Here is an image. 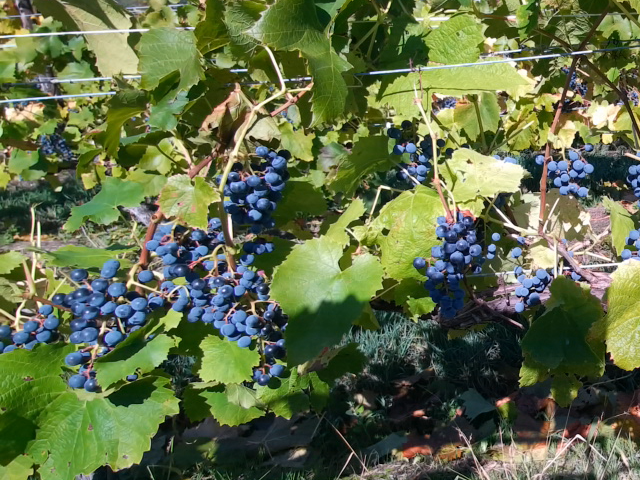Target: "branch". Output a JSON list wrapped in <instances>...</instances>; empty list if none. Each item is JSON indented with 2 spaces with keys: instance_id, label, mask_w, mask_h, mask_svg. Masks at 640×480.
I'll use <instances>...</instances> for the list:
<instances>
[{
  "instance_id": "30e6481e",
  "label": "branch",
  "mask_w": 640,
  "mask_h": 480,
  "mask_svg": "<svg viewBox=\"0 0 640 480\" xmlns=\"http://www.w3.org/2000/svg\"><path fill=\"white\" fill-rule=\"evenodd\" d=\"M578 61L582 62L583 64H585L591 71L595 72L598 76H600L604 81H606L614 90H616L619 95L621 96V99L623 100L626 109L628 111V115L630 116V122L633 124V127L636 131L637 134V138L640 139V123L637 121V119L633 116L632 113V108H631V103L629 102V97L628 94L626 93V91L624 90V88L619 85L609 74H607L605 71H603L601 68H599L597 65H595L589 58L585 57L584 55H575L572 57L570 64H569V68L568 71L565 75L564 81H563V86L562 88L559 90V96L557 99V103L555 106V111H554V115H553V119L551 121V126L547 132V139L545 142V149H544V155L546 157H549L551 155L552 152V134L555 133L557 131L558 128V123L560 121V117H561V113H562V108L564 105V101L566 98V93L569 91L570 88V84H571V80L572 77L576 71V67L578 64Z\"/></svg>"
},
{
  "instance_id": "ea751061",
  "label": "branch",
  "mask_w": 640,
  "mask_h": 480,
  "mask_svg": "<svg viewBox=\"0 0 640 480\" xmlns=\"http://www.w3.org/2000/svg\"><path fill=\"white\" fill-rule=\"evenodd\" d=\"M18 295L20 297H22V298H25V299H30V300H33V301H37V302H41V303H44V304L51 305L54 308H56L57 310L62 311V312H70L71 311L70 307L61 306L57 302H55L54 300H51V299H47V298H44V297L36 296V295H33V294H27V293L22 292V291H19Z\"/></svg>"
},
{
  "instance_id": "325d2c04",
  "label": "branch",
  "mask_w": 640,
  "mask_h": 480,
  "mask_svg": "<svg viewBox=\"0 0 640 480\" xmlns=\"http://www.w3.org/2000/svg\"><path fill=\"white\" fill-rule=\"evenodd\" d=\"M312 90L311 86L308 87H298V88H286L285 90L278 92L274 95H272L271 97L267 98L264 101H261L259 103H257L253 108L249 109L246 114H245V121L243 123L240 135L238 136L237 139H235L233 141V144L235 145V147L233 148V150L231 151V153L229 154V157L227 158V161L225 163V166L223 168V172L222 175L219 179V183H218V189H217V193L219 195H222L225 191V186H226V182L229 178V174L231 171V168L234 164V161L237 157V155L239 154V152L241 151V149L244 147V140L247 137L248 131L250 129V125L252 124V121L254 120V116L257 113L258 109H260L261 107L267 106L270 103L274 102L276 99L283 97L285 95H287L288 93H300V92H310Z\"/></svg>"
},
{
  "instance_id": "1af6ec82",
  "label": "branch",
  "mask_w": 640,
  "mask_h": 480,
  "mask_svg": "<svg viewBox=\"0 0 640 480\" xmlns=\"http://www.w3.org/2000/svg\"><path fill=\"white\" fill-rule=\"evenodd\" d=\"M138 259H142L143 266H147L149 264V261L152 259V256L150 255V252L147 249H143L138 257Z\"/></svg>"
},
{
  "instance_id": "170604dd",
  "label": "branch",
  "mask_w": 640,
  "mask_h": 480,
  "mask_svg": "<svg viewBox=\"0 0 640 480\" xmlns=\"http://www.w3.org/2000/svg\"><path fill=\"white\" fill-rule=\"evenodd\" d=\"M413 93L415 95V98L417 100V105L419 107V110L421 112V115L424 118L425 124H426V129L432 139L433 142V182L434 185L437 189L438 195H439V199L442 203V205L445 208V211L449 217L450 221H454L455 217L453 215V212L448 204V202L446 201V198L444 196L443 193V189L441 187L440 184L437 183L438 178V139L437 136L435 135V132L432 128V124L429 118V115L427 114L424 105H423V101H422V97L420 96V92L418 91V81L414 80L413 81Z\"/></svg>"
},
{
  "instance_id": "1d269e1b",
  "label": "branch",
  "mask_w": 640,
  "mask_h": 480,
  "mask_svg": "<svg viewBox=\"0 0 640 480\" xmlns=\"http://www.w3.org/2000/svg\"><path fill=\"white\" fill-rule=\"evenodd\" d=\"M215 159L213 154L207 155L201 162L192 167L188 173L190 178H193L200 170L206 168L208 164Z\"/></svg>"
},
{
  "instance_id": "ca6c30ca",
  "label": "branch",
  "mask_w": 640,
  "mask_h": 480,
  "mask_svg": "<svg viewBox=\"0 0 640 480\" xmlns=\"http://www.w3.org/2000/svg\"><path fill=\"white\" fill-rule=\"evenodd\" d=\"M161 221H162V218H161V214L159 212H155L151 216L150 225H149L148 231L144 235V239L146 241H149L153 237V235L155 233V230H156V227H157V223H160Z\"/></svg>"
},
{
  "instance_id": "982ccf7c",
  "label": "branch",
  "mask_w": 640,
  "mask_h": 480,
  "mask_svg": "<svg viewBox=\"0 0 640 480\" xmlns=\"http://www.w3.org/2000/svg\"><path fill=\"white\" fill-rule=\"evenodd\" d=\"M549 172V163L544 161L539 176V188L541 189V198L538 206V232H545V209L548 201V185L546 184L547 174Z\"/></svg>"
},
{
  "instance_id": "1ff4a987",
  "label": "branch",
  "mask_w": 640,
  "mask_h": 480,
  "mask_svg": "<svg viewBox=\"0 0 640 480\" xmlns=\"http://www.w3.org/2000/svg\"><path fill=\"white\" fill-rule=\"evenodd\" d=\"M217 208H218V214L222 223V229L225 234V241L228 243L227 248L229 253V264L231 266H234L236 264V250H235V245L232 238V231L229 226V220H228L226 211L224 209V205L222 203H219L217 205Z\"/></svg>"
},
{
  "instance_id": "45aa463d",
  "label": "branch",
  "mask_w": 640,
  "mask_h": 480,
  "mask_svg": "<svg viewBox=\"0 0 640 480\" xmlns=\"http://www.w3.org/2000/svg\"><path fill=\"white\" fill-rule=\"evenodd\" d=\"M603 20L598 18L595 21V24L591 27L588 33L584 34L582 38L579 40L578 45L576 46L574 43H570L563 36L559 35L554 29L542 28L538 25L533 27V31L540 35L551 36L554 40L560 43L563 47L568 50H583L586 43L596 34V32L601 28V24Z\"/></svg>"
}]
</instances>
